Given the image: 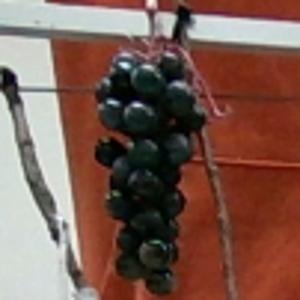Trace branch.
<instances>
[{
	"mask_svg": "<svg viewBox=\"0 0 300 300\" xmlns=\"http://www.w3.org/2000/svg\"><path fill=\"white\" fill-rule=\"evenodd\" d=\"M0 65V94L5 97L14 125V140L25 183L31 192L36 209L45 221L50 240L59 249L66 273L74 284L76 300H98L96 293L88 287L84 279L83 271L59 221L57 201L46 184L37 160L36 146L30 135L24 101L20 96L18 75L6 64Z\"/></svg>",
	"mask_w": 300,
	"mask_h": 300,
	"instance_id": "obj_1",
	"label": "branch"
},
{
	"mask_svg": "<svg viewBox=\"0 0 300 300\" xmlns=\"http://www.w3.org/2000/svg\"><path fill=\"white\" fill-rule=\"evenodd\" d=\"M201 160L204 164L210 189L214 195L218 236L221 247L222 271L226 280L228 300H240L236 282L235 237L232 215L229 210L227 196L220 179L217 166L210 152L208 129L195 137Z\"/></svg>",
	"mask_w": 300,
	"mask_h": 300,
	"instance_id": "obj_2",
	"label": "branch"
},
{
	"mask_svg": "<svg viewBox=\"0 0 300 300\" xmlns=\"http://www.w3.org/2000/svg\"><path fill=\"white\" fill-rule=\"evenodd\" d=\"M175 23L171 29V49L185 58L187 65L192 68L188 52V39L196 27L197 21L193 17V9L186 6L183 0H177V6L174 11Z\"/></svg>",
	"mask_w": 300,
	"mask_h": 300,
	"instance_id": "obj_3",
	"label": "branch"
}]
</instances>
